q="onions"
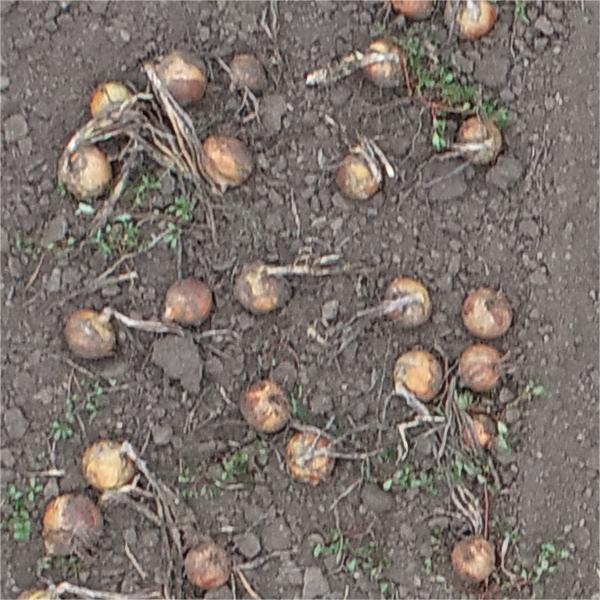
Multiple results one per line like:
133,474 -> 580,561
460,413 -> 500,448
459,120 -> 499,159
383,274 -> 428,325
65,309 -> 113,357
241,378 -> 288,432
393,348 -> 442,398
364,37 -> 403,86
162,276 -> 213,324
18,590 -> 60,600
392,0 -> 435,21
154,50 -> 206,104
87,80 -> 132,119
82,440 -> 132,489
284,429 -> 333,481
458,343 -> 503,390
58,143 -> 109,195
463,288 -> 510,336
334,152 -> 381,200
201,133 -> 253,184
454,0 -> 496,38
452,534 -> 493,580
225,52 -> 267,91
236,261 -> 283,311
183,543 -> 227,588
39,494 -> 101,553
